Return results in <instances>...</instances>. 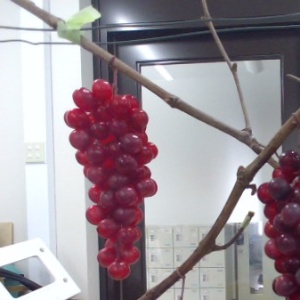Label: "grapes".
Wrapping results in <instances>:
<instances>
[{
  "mask_svg": "<svg viewBox=\"0 0 300 300\" xmlns=\"http://www.w3.org/2000/svg\"><path fill=\"white\" fill-rule=\"evenodd\" d=\"M75 107L63 115V122L74 130L68 135L75 148V160L84 167L90 183L88 197L95 202L85 216L104 238L96 258L115 280L126 279L130 264L139 261L135 244L141 238L138 225L143 197H154L158 184L149 167L158 147L145 134L149 117L139 108L134 94L115 96L110 82L94 79L72 92Z\"/></svg>",
  "mask_w": 300,
  "mask_h": 300,
  "instance_id": "1",
  "label": "grapes"
},
{
  "mask_svg": "<svg viewBox=\"0 0 300 300\" xmlns=\"http://www.w3.org/2000/svg\"><path fill=\"white\" fill-rule=\"evenodd\" d=\"M257 194L264 204L265 234L270 239L264 254L281 274L272 291L287 300H300V153H281L272 181L263 182Z\"/></svg>",
  "mask_w": 300,
  "mask_h": 300,
  "instance_id": "2",
  "label": "grapes"
}]
</instances>
